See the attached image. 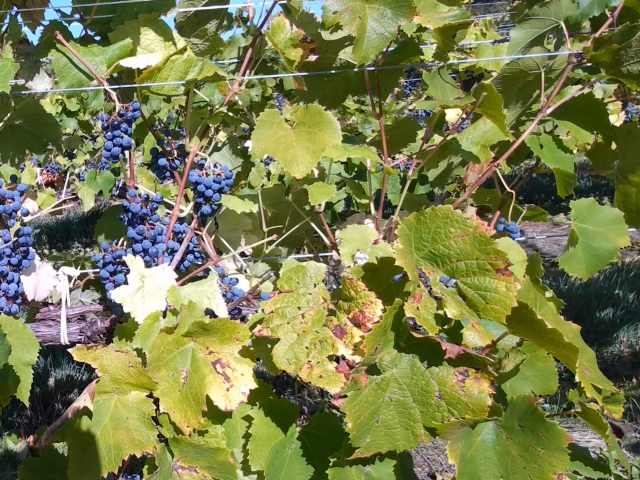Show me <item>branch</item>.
<instances>
[{
    "instance_id": "30e6481e",
    "label": "branch",
    "mask_w": 640,
    "mask_h": 480,
    "mask_svg": "<svg viewBox=\"0 0 640 480\" xmlns=\"http://www.w3.org/2000/svg\"><path fill=\"white\" fill-rule=\"evenodd\" d=\"M575 65V61L571 60L564 72V75L562 77V79L557 83V85L551 90L550 94L548 95V97L546 98V100L543 103V106L541 107V109L539 110V113L537 114V117L535 118V120L532 122L531 126L528 128L527 131H525L522 135H520L517 140L500 156L499 160L494 163L493 165H491L481 176V178L472 186V188L467 191L465 194H463L459 199H457L453 204L452 207L453 208H457L462 202H464L468 197H470L471 195H473L476 190L478 189V187H480L485 180L487 179V177L489 176V174L494 171L495 169H497L498 167H500L505 159L520 145V143L527 137L530 136L534 129L536 128V126L538 125V123L541 121L545 111L548 108V105L550 104L551 100L554 98V96L556 95V93L558 92V90L561 89V87L566 83L567 79L569 78L570 72L573 69Z\"/></svg>"
},
{
    "instance_id": "325d2c04",
    "label": "branch",
    "mask_w": 640,
    "mask_h": 480,
    "mask_svg": "<svg viewBox=\"0 0 640 480\" xmlns=\"http://www.w3.org/2000/svg\"><path fill=\"white\" fill-rule=\"evenodd\" d=\"M210 129H211V125L207 124L205 126V128L202 130L198 141L194 145V149L190 153L189 159H188L187 164L185 166L184 173L182 175V180H181V177H180L178 172H174L173 173V176H174V178H175V180H176V182H177V184L179 186L180 193H179V197H178L177 203H176V205L174 207V210L171 213V218L172 219L170 221L168 233L166 235V239L167 240H170L172 238V236H173V231H174L175 224H176V222L178 220V217H179V210H180V208L182 206L183 200L185 201V205L186 206L190 205V199H189V197H188V195L186 193L187 178L189 176V172H190L191 166L193 164L194 158H195L196 154L199 152V147L202 145V143H203L207 133L210 131Z\"/></svg>"
},
{
    "instance_id": "170604dd",
    "label": "branch",
    "mask_w": 640,
    "mask_h": 480,
    "mask_svg": "<svg viewBox=\"0 0 640 480\" xmlns=\"http://www.w3.org/2000/svg\"><path fill=\"white\" fill-rule=\"evenodd\" d=\"M24 16L26 18H28L30 21H33L35 24H37L38 26L42 27L43 29H45L46 32L50 33L54 38L58 39L60 42L63 43L64 48L68 51L69 54H71L72 56H74L77 61L87 70V72L101 85H104L105 87L109 86V83L106 82L105 80H103L90 66L89 64L81 57L80 53L78 50L74 49L68 42V40L61 36L60 34H58L53 28L49 27L46 23L40 21L37 17L32 16L30 13L25 12Z\"/></svg>"
},
{
    "instance_id": "45aa463d",
    "label": "branch",
    "mask_w": 640,
    "mask_h": 480,
    "mask_svg": "<svg viewBox=\"0 0 640 480\" xmlns=\"http://www.w3.org/2000/svg\"><path fill=\"white\" fill-rule=\"evenodd\" d=\"M276 238H277V235H276V234H272V235H270L269 237H267V238H265V239H263V240H260V241H257V242H254V243H251V244H249V245H247V246H245V247H243V248H234V249H232L231 251H229V252L225 253L224 255L219 256V257H217V258H215V259H212V260L208 261L206 264L202 265L201 267H199V268H197V269H194V270L190 273V275H187V276H185V277L181 278V279L177 282V285H178V286L183 285L184 283L188 282L189 280H192V279H193L197 274H199V273H201V272H203V271L207 270L210 266L215 265V264H218V263H219V262H221V261L227 260L228 258H230V257L234 256V255H235V254H237V253H245V252H248V251H249V250H251V249H254V248H256V247H259V246L265 245V244H267V243H270L271 241L275 240Z\"/></svg>"
},
{
    "instance_id": "982ccf7c",
    "label": "branch",
    "mask_w": 640,
    "mask_h": 480,
    "mask_svg": "<svg viewBox=\"0 0 640 480\" xmlns=\"http://www.w3.org/2000/svg\"><path fill=\"white\" fill-rule=\"evenodd\" d=\"M375 83H376V98H377V128L378 134L380 138L381 150L384 154L383 163L387 164L389 159V152L386 147V141L382 126V96H381V80L379 72H374Z\"/></svg>"
},
{
    "instance_id": "1ff4a987",
    "label": "branch",
    "mask_w": 640,
    "mask_h": 480,
    "mask_svg": "<svg viewBox=\"0 0 640 480\" xmlns=\"http://www.w3.org/2000/svg\"><path fill=\"white\" fill-rule=\"evenodd\" d=\"M280 2V0H274L271 4V6L269 7V10L266 12L265 16L259 21V23L257 24V26L254 29L252 38L250 40V44H249V48L245 57L244 62L241 64V66L239 67V71H238V75L242 76L244 73V70L246 69L247 65L250 63V59L251 56L253 54V50L255 47V43L258 37V34L261 30V28L264 26V24L266 23V21L270 18L271 14L274 12L275 7L278 5V3Z\"/></svg>"
},
{
    "instance_id": "ea751061",
    "label": "branch",
    "mask_w": 640,
    "mask_h": 480,
    "mask_svg": "<svg viewBox=\"0 0 640 480\" xmlns=\"http://www.w3.org/2000/svg\"><path fill=\"white\" fill-rule=\"evenodd\" d=\"M388 188V173L384 172L383 173V185L382 188L380 190V205H379V212H378V218H377V222H376V230L380 231L381 230V225H382V220H383V214H384V208H385V193L386 190Z\"/></svg>"
},
{
    "instance_id": "ca6c30ca",
    "label": "branch",
    "mask_w": 640,
    "mask_h": 480,
    "mask_svg": "<svg viewBox=\"0 0 640 480\" xmlns=\"http://www.w3.org/2000/svg\"><path fill=\"white\" fill-rule=\"evenodd\" d=\"M191 218H192V220L194 221V223L197 225L198 230L200 231V233H201L202 237L204 238V242H205V245H206V248H207V250H208L209 254H210L212 257H215V256H216V252L214 251V249H213V247H212V245H211V242H210L209 236H208V234H207L206 230L204 229V227H203L202 223L200 222V220L198 219V217H197V215H196V214H192V215H191Z\"/></svg>"
},
{
    "instance_id": "1d269e1b",
    "label": "branch",
    "mask_w": 640,
    "mask_h": 480,
    "mask_svg": "<svg viewBox=\"0 0 640 480\" xmlns=\"http://www.w3.org/2000/svg\"><path fill=\"white\" fill-rule=\"evenodd\" d=\"M623 7H624V3H623V2H620V3L616 6V8H615V10H614V12H613V14H612V16H611V19H610V20H608L606 23H604V24H603V25L598 29V31H597V35H598V36H601V35H602V33H603V31H604L606 28H608L609 26H611V25L614 23V20L617 18L618 14L620 13V11H621V9H622Z\"/></svg>"
},
{
    "instance_id": "1af6ec82",
    "label": "branch",
    "mask_w": 640,
    "mask_h": 480,
    "mask_svg": "<svg viewBox=\"0 0 640 480\" xmlns=\"http://www.w3.org/2000/svg\"><path fill=\"white\" fill-rule=\"evenodd\" d=\"M140 118L142 120V122L144 123L145 127L147 128V130L149 131V133L151 134L152 138L155 141L159 140V136L157 135L156 131L153 129V127L150 125L147 117L145 116V113L143 111L139 112Z\"/></svg>"
},
{
    "instance_id": "2b1400db",
    "label": "branch",
    "mask_w": 640,
    "mask_h": 480,
    "mask_svg": "<svg viewBox=\"0 0 640 480\" xmlns=\"http://www.w3.org/2000/svg\"><path fill=\"white\" fill-rule=\"evenodd\" d=\"M239 85H240L239 81H235L234 82V86H233L232 90L226 95L224 100L221 102V106L222 107H225L229 103V101L232 98V96H234L235 93L238 91Z\"/></svg>"
}]
</instances>
